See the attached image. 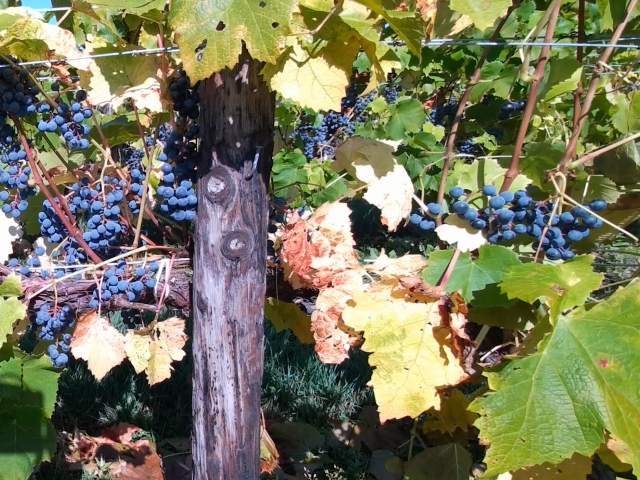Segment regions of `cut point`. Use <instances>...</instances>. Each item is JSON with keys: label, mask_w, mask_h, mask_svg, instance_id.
<instances>
[{"label": "cut point", "mask_w": 640, "mask_h": 480, "mask_svg": "<svg viewBox=\"0 0 640 480\" xmlns=\"http://www.w3.org/2000/svg\"><path fill=\"white\" fill-rule=\"evenodd\" d=\"M443 160H445V156H444V157H440V158L435 159L434 161H432V162H431V163H429L428 165H425V166L423 167V171H426L428 168H430V167L434 166L435 164H437L438 162L443 161Z\"/></svg>", "instance_id": "1"}, {"label": "cut point", "mask_w": 640, "mask_h": 480, "mask_svg": "<svg viewBox=\"0 0 640 480\" xmlns=\"http://www.w3.org/2000/svg\"><path fill=\"white\" fill-rule=\"evenodd\" d=\"M107 163H108V162H107V160L105 159V160H104V162H103V166H102L101 173H100V178H103V176H104L105 169H106V164H107Z\"/></svg>", "instance_id": "2"}]
</instances>
